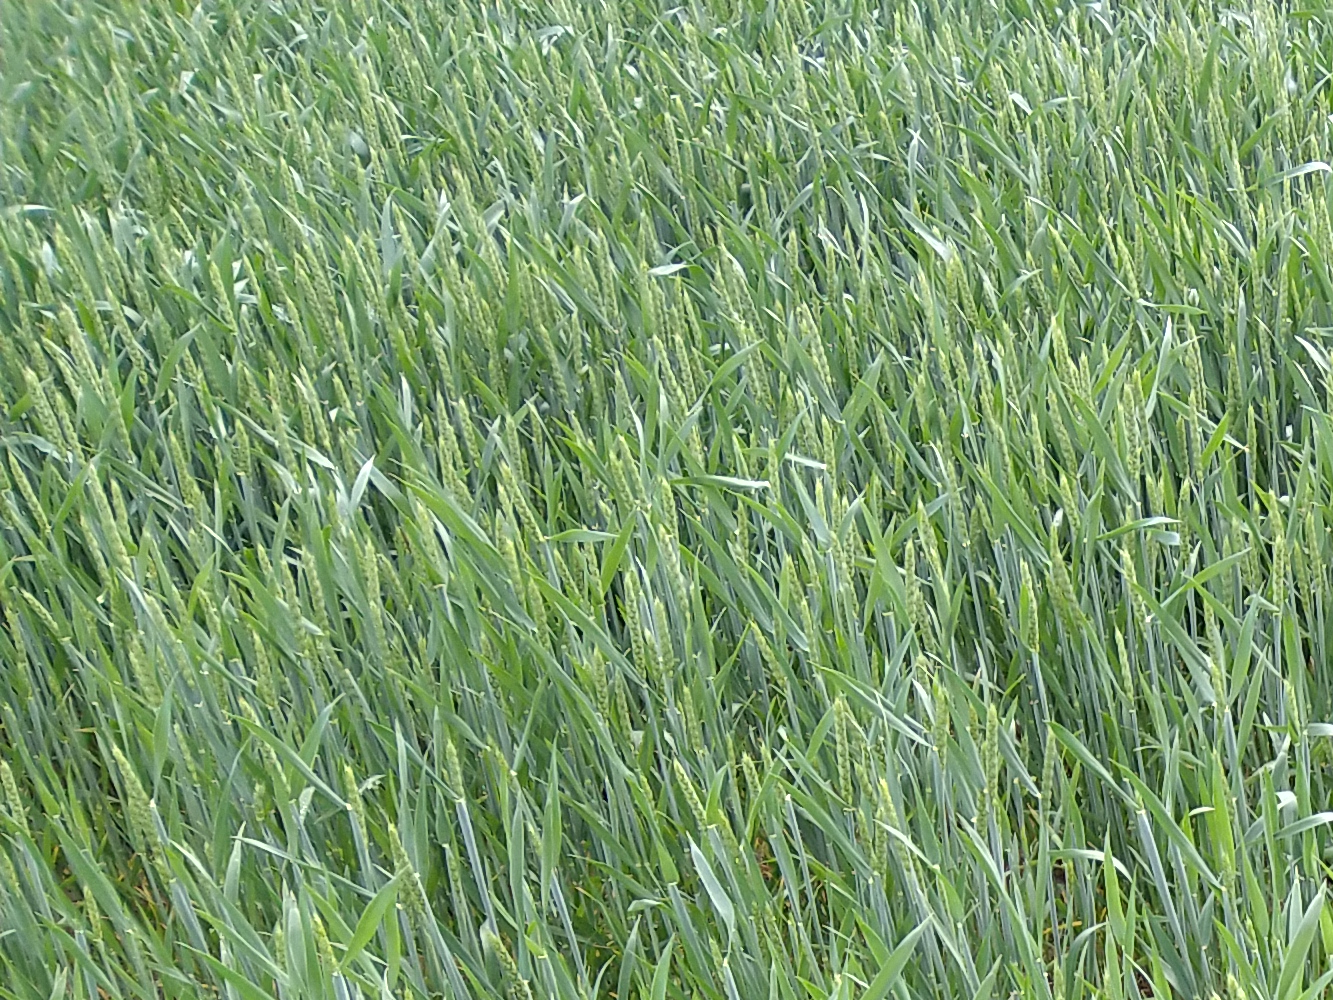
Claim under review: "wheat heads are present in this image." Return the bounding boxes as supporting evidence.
[673,274,684,336]
[507,418,526,484]
[1058,474,1078,548]
[1319,197,1333,271]
[1045,572,1073,637]
[976,790,989,844]
[1032,411,1048,502]
[918,68,934,116]
[327,655,368,720]
[24,368,65,461]
[1113,625,1133,698]
[49,675,69,722]
[310,913,338,973]
[12,514,49,562]
[58,306,116,399]
[741,621,794,692]
[173,724,198,785]
[1122,387,1137,472]
[652,597,674,672]
[256,545,279,600]
[6,455,50,526]
[540,287,547,325]
[673,758,710,831]
[156,222,180,254]
[142,156,164,212]
[519,255,540,315]
[777,20,789,64]
[265,267,288,315]
[581,447,598,526]
[903,73,915,126]
[195,589,219,629]
[1306,511,1321,586]
[827,530,856,635]
[1316,86,1323,136]
[284,707,305,749]
[486,730,511,770]
[1188,320,1206,411]
[948,259,955,318]
[870,477,885,530]
[592,647,607,714]
[1257,320,1269,382]
[590,372,604,426]
[345,235,378,301]
[938,345,952,402]
[1230,138,1255,235]
[474,69,503,121]
[5,255,30,311]
[446,740,464,799]
[879,112,905,184]
[1132,373,1150,453]
[6,609,28,666]
[618,438,650,517]
[938,405,958,471]
[219,57,251,126]
[701,224,720,265]
[152,315,174,360]
[796,305,831,378]
[396,303,419,349]
[844,322,861,391]
[847,256,856,305]
[273,927,285,972]
[91,218,125,303]
[890,310,900,354]
[799,600,819,675]
[32,282,45,310]
[485,235,507,291]
[1202,597,1212,653]
[639,263,654,340]
[242,253,259,296]
[841,499,857,569]
[839,63,860,114]
[872,395,890,464]
[300,366,329,445]
[954,344,968,399]
[265,397,298,477]
[1047,399,1078,490]
[713,811,744,873]
[660,526,693,628]
[973,489,990,536]
[148,599,198,691]
[375,556,422,633]
[128,800,146,851]
[371,161,388,201]
[607,152,626,214]
[98,154,119,200]
[688,191,699,239]
[119,85,140,144]
[386,828,429,914]
[670,303,679,331]
[746,327,771,395]
[1244,916,1260,955]
[599,240,618,329]
[345,766,367,850]
[1286,165,1291,222]
[59,247,96,303]
[530,68,543,123]
[1218,536,1230,614]
[754,915,774,964]
[420,184,465,264]
[999,339,1013,403]
[1222,765,1235,822]
[235,357,250,413]
[1181,346,1195,403]
[583,538,599,574]
[89,470,136,576]
[773,101,792,160]
[1028,254,1048,320]
[610,450,634,514]
[1300,98,1308,136]
[212,259,242,352]
[338,427,355,478]
[469,288,488,346]
[701,135,718,197]
[553,547,585,611]
[773,170,788,212]
[1234,516,1247,583]
[106,375,132,460]
[128,278,148,323]
[684,287,701,352]
[479,298,500,336]
[651,477,680,562]
[1067,96,1076,144]
[1259,200,1267,273]
[1207,110,1213,152]
[278,663,292,697]
[109,581,135,649]
[976,340,993,417]
[109,481,133,548]
[651,175,660,208]
[460,348,479,378]
[791,44,806,104]
[397,220,423,300]
[872,270,892,321]
[232,418,250,469]
[1187,35,1201,100]
[514,96,525,125]
[290,385,314,446]
[767,913,787,969]
[80,286,109,356]
[683,138,697,184]
[985,62,1014,136]
[1173,225,1182,283]
[1078,349,1094,415]
[348,533,385,607]
[1204,655,1224,717]
[1238,109,1244,150]
[654,338,679,394]
[1223,973,1262,1000]
[0,759,29,836]
[449,857,462,903]
[44,162,63,212]
[281,158,301,254]
[305,634,318,685]
[0,850,21,892]
[878,781,914,873]
[952,254,978,325]
[376,101,404,161]
[227,36,253,107]
[394,877,424,924]
[683,685,704,750]
[1001,430,1016,483]
[1168,26,1188,100]
[914,590,935,654]
[1221,856,1237,914]
[1095,151,1106,217]
[1245,402,1257,479]
[798,392,823,461]
[1187,391,1201,485]
[236,700,289,798]
[1199,245,1211,294]
[359,70,376,147]
[983,704,997,811]
[910,378,926,442]
[1323,734,1333,803]
[211,658,224,705]
[569,311,586,370]
[946,460,968,544]
[1275,84,1289,147]
[856,812,873,865]
[784,387,807,455]
[366,604,392,683]
[442,105,486,197]
[1267,488,1286,538]
[721,422,735,467]
[1249,245,1261,313]
[1284,682,1295,731]
[930,682,947,780]
[164,203,195,245]
[721,254,747,304]
[338,323,360,399]
[959,124,972,161]
[1279,540,1292,606]
[676,338,695,403]
[367,238,380,273]
[581,255,600,311]
[1132,119,1141,183]
[434,387,452,489]
[487,327,508,403]
[773,303,788,344]
[613,663,632,742]
[618,379,636,451]
[807,110,827,177]
[1223,295,1232,348]
[144,555,158,590]
[642,626,665,683]
[1065,357,1078,395]
[639,771,656,829]
[267,371,280,408]
[1049,529,1090,629]
[737,502,749,568]
[189,319,224,394]
[784,230,799,283]
[644,220,664,264]
[371,280,404,358]
[495,510,519,607]
[301,547,326,638]
[121,129,149,191]
[766,115,775,153]
[1272,937,1288,979]
[278,559,301,616]
[780,555,803,612]
[1115,226,1139,298]
[495,948,534,1000]
[479,635,502,708]
[768,434,778,498]
[1216,246,1239,298]
[79,515,109,585]
[652,290,670,346]
[240,196,269,243]
[820,415,846,492]
[177,172,203,208]
[252,635,276,705]
[181,352,216,423]
[283,88,312,184]
[737,756,765,817]
[305,250,341,329]
[1041,733,1054,819]
[530,408,544,467]
[330,374,352,412]
[824,244,838,303]
[423,652,436,703]
[1181,492,1193,562]
[833,696,852,808]
[716,273,735,315]
[693,357,710,402]
[525,580,555,663]
[1245,535,1262,586]
[448,422,466,482]
[21,589,59,635]
[582,70,614,125]
[315,119,338,184]
[1051,324,1067,393]
[297,269,331,348]
[150,450,165,489]
[856,123,872,180]
[128,634,166,715]
[895,445,903,494]
[1281,267,1289,348]
[0,461,19,525]
[1124,553,1148,622]
[1019,566,1038,646]
[170,431,198,529]
[1024,55,1044,107]
[106,294,145,369]
[160,152,182,195]
[500,464,543,539]
[941,10,963,87]
[540,228,552,263]
[870,645,879,687]
[1309,138,1328,206]
[1148,478,1161,527]
[425,313,456,398]
[115,747,170,893]
[1176,412,1188,475]
[663,110,681,188]
[83,886,100,936]
[1144,217,1170,263]
[906,544,915,630]
[1037,118,1049,193]
[738,276,763,339]
[436,250,470,320]
[552,49,566,105]
[146,226,170,291]
[919,502,943,573]
[1273,539,1283,610]
[170,584,191,626]
[58,360,82,404]
[621,572,646,678]
[34,265,58,306]
[55,397,86,475]
[42,338,77,377]
[1099,222,1119,267]
[450,483,490,535]
[535,324,572,406]
[977,265,1005,325]
[1291,538,1310,608]
[1211,82,1230,132]
[459,402,482,475]
[286,306,312,352]
[253,777,276,821]
[802,539,824,596]
[1104,968,1117,1000]
[737,325,757,398]
[1066,855,1077,902]
[619,139,642,203]
[14,305,51,379]
[854,761,880,812]
[751,183,773,236]
[1010,66,1026,125]
[679,419,705,506]
[416,504,446,570]
[362,54,379,95]
[1141,90,1164,152]
[750,432,758,478]
[240,366,261,397]
[1228,353,1239,424]
[527,131,543,185]
[1088,71,1108,128]
[873,814,885,878]
[228,579,243,610]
